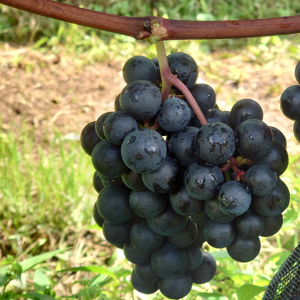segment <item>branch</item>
Segmentation results:
<instances>
[{"label":"branch","mask_w":300,"mask_h":300,"mask_svg":"<svg viewBox=\"0 0 300 300\" xmlns=\"http://www.w3.org/2000/svg\"><path fill=\"white\" fill-rule=\"evenodd\" d=\"M0 4L45 19L130 36L151 45L156 40L240 39L300 33V15L226 21L177 20L110 15L53 0H0Z\"/></svg>","instance_id":"1"}]
</instances>
